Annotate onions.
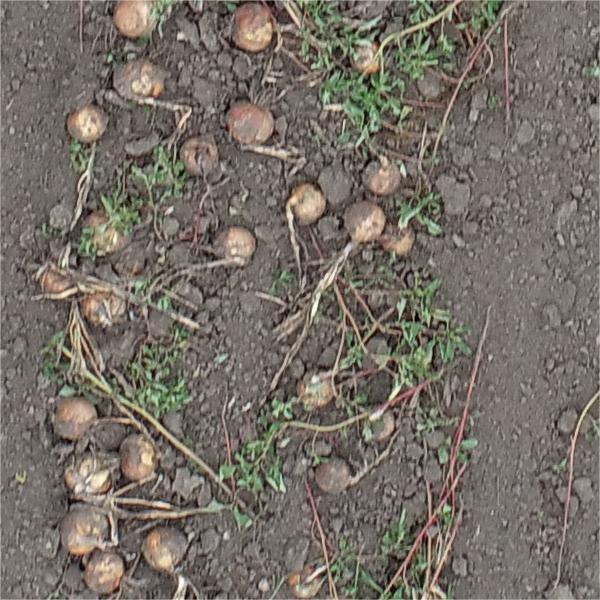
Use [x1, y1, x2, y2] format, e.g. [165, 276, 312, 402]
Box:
[218, 224, 255, 263]
[313, 458, 349, 493]
[81, 548, 124, 590]
[53, 395, 96, 438]
[142, 526, 184, 568]
[360, 157, 399, 196]
[121, 60, 166, 100]
[66, 457, 113, 497]
[382, 228, 413, 257]
[301, 370, 334, 407]
[91, 417, 126, 452]
[59, 504, 111, 553]
[79, 292, 117, 326]
[353, 43, 383, 72]
[229, 3, 272, 50]
[291, 566, 323, 597]
[286, 184, 324, 221]
[109, 1, 149, 38]
[342, 202, 383, 245]
[67, 105, 103, 141]
[224, 102, 271, 144]
[180, 137, 216, 177]
[38, 263, 75, 298]
[366, 408, 393, 441]
[78, 213, 125, 254]
[117, 436, 155, 479]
